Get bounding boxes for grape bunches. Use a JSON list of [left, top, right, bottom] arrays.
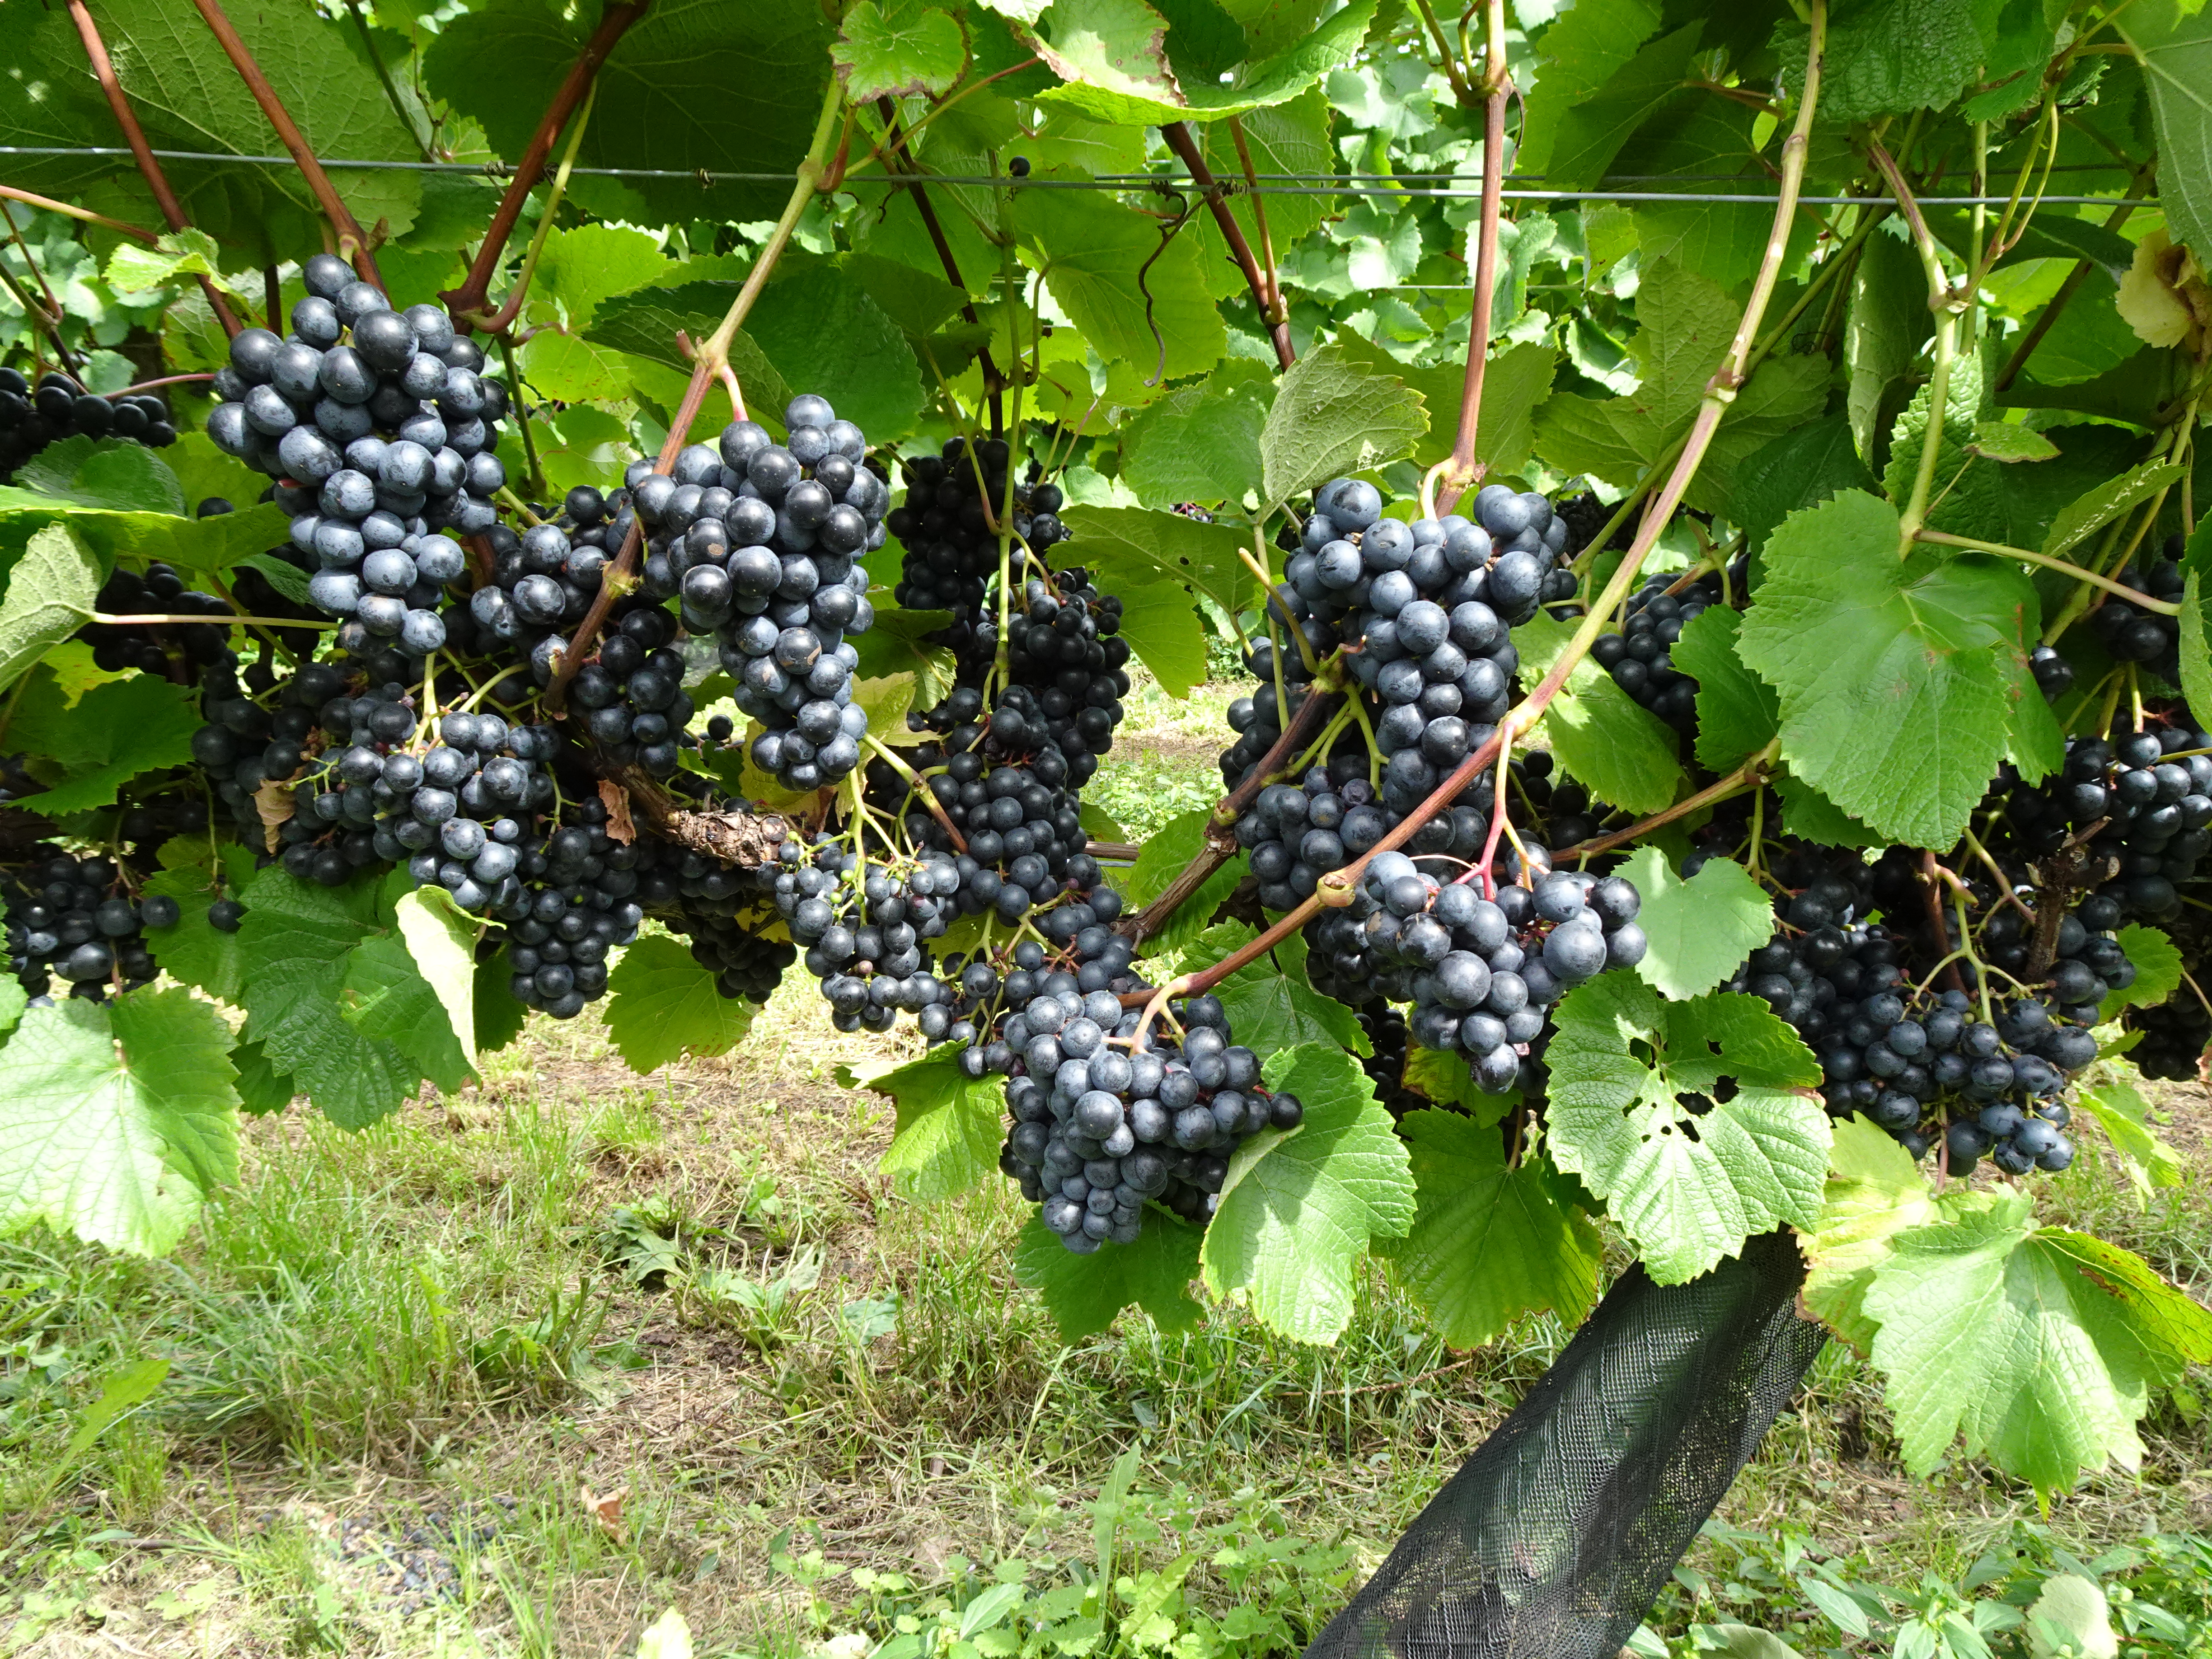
[[2053, 697, 2212, 923], [103, 762, 245, 875], [1220, 640, 1371, 796], [907, 885, 1132, 1080], [191, 662, 377, 891], [995, 988, 1304, 1254], [472, 487, 695, 778], [2097, 530, 2189, 687], [2121, 858, 2212, 1085], [643, 797, 796, 1004], [0, 369, 181, 487], [1235, 765, 1487, 1008], [0, 844, 77, 998], [56, 856, 182, 1002], [75, 563, 238, 688], [1874, 837, 1953, 943], [361, 547, 529, 711], [195, 254, 508, 652], [1679, 814, 1897, 1057], [1928, 646, 2079, 896], [1944, 994, 2094, 1174], [490, 797, 660, 1019], [773, 831, 960, 1033], [884, 435, 1063, 698], [1819, 965, 1970, 1158], [606, 393, 889, 791], [1486, 752, 1643, 876], [1945, 881, 2037, 994], [1267, 476, 1572, 797], [211, 899, 248, 934], [1592, 569, 1726, 740], [1363, 840, 1650, 1090], [980, 567, 1128, 790], [873, 684, 1122, 934], [2006, 887, 2136, 1029], [311, 697, 557, 913]]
